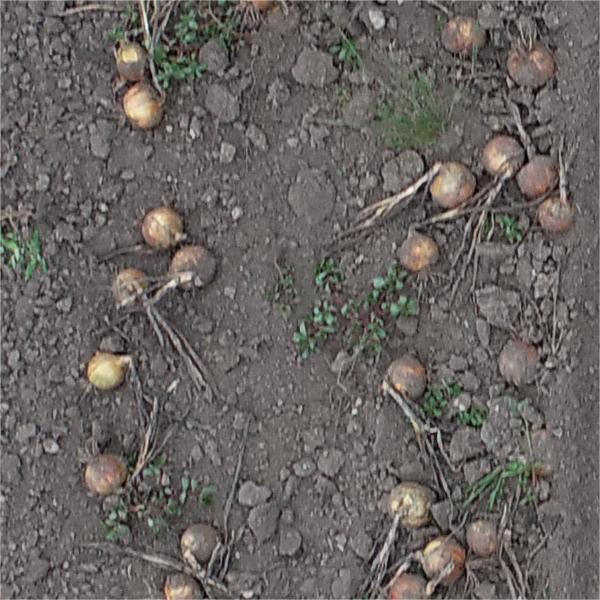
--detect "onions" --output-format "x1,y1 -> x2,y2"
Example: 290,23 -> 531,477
519,159 -> 555,197
397,231 -> 438,271
111,39 -> 148,77
442,15 -> 482,53
463,517 -> 497,554
182,524 -> 219,563
534,196 -> 574,234
387,482 -> 433,525
387,570 -> 424,599
507,45 -> 553,86
140,205 -> 181,246
421,537 -> 463,579
119,83 -> 161,126
170,244 -> 214,286
111,266 -> 146,304
84,454 -> 124,495
162,573 -> 199,599
86,352 -> 126,389
430,162 -> 474,208
384,355 -> 425,401
480,134 -> 523,176
497,339 -> 539,383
